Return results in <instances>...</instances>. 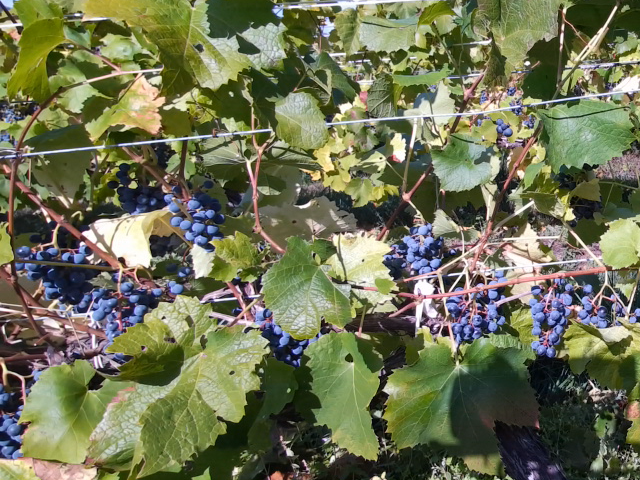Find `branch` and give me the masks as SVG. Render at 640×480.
Instances as JSON below:
<instances>
[{"mask_svg":"<svg viewBox=\"0 0 640 480\" xmlns=\"http://www.w3.org/2000/svg\"><path fill=\"white\" fill-rule=\"evenodd\" d=\"M541 129H542V125L538 124L536 126V128L534 129V131L532 132V134L530 135L529 140L527 141V143L524 145L522 150L519 152L518 157H516L514 159L513 164L511 166L510 170L508 171V174H507L505 180L503 181V185L500 188V190L498 192V196L496 198V205H495V209L493 211L492 218L488 219L486 233L481 238L478 253H477L475 259L473 260L471 267L469 268L468 276H467V279H466V281L464 283V288L465 289L464 290H453V291H442V292L435 293V294H421V295L414 294V293H409V292H405V291H400V290H392L391 291L392 295L412 298L414 300L437 299V298H441V297H445V296L467 295V294H472V293H475V292L488 291V290H492L493 288H496V287L511 286V285H515V284L536 282V281H540V280H550V279H553L554 277L582 276V275H586V274H589V273H593L594 275H598V274H601V273H605L606 271H612L613 270L612 266H603V267H590V268L583 269V270H580V271H571V272L557 271V272H552L551 274H548V275H538V276H534V277L518 278V279L509 280V281L493 282V283H491L489 285H486V286H478V287L469 288V286H470V284L472 282V279H473L472 271L476 269L478 263L480 262V259L483 256L485 243L491 236L492 225H493V222H494L498 207H499V205L501 203V200L503 198V195H504V193H505V191H506V189L508 187V184H509L510 180L512 179V176H513L515 170L520 168V164H521V162L523 160L524 155L526 154V152L528 151V149L530 148V146L534 142L535 138L537 137V135H538V133H539V131Z\"/></svg>","mask_w":640,"mask_h":480,"instance_id":"obj_1","label":"branch"},{"mask_svg":"<svg viewBox=\"0 0 640 480\" xmlns=\"http://www.w3.org/2000/svg\"><path fill=\"white\" fill-rule=\"evenodd\" d=\"M19 161L17 159H13L11 161V168L8 166L5 160H0L1 169L9 176V186H8V204L6 210L7 217V233L11 237L10 245L12 246L13 254H15L14 250V206H15V188L20 189L26 196L33 200V202L42 208L45 212H47L56 222H58L63 228L67 229L75 238H77L80 242L90 247L95 253L104 258L109 264H111L115 269L120 271V262L112 257L107 251L99 247L94 241L90 238L84 236L80 231H78L70 222L64 220L51 206L45 203L41 198H39L28 186L22 183L17 177Z\"/></svg>","mask_w":640,"mask_h":480,"instance_id":"obj_2","label":"branch"},{"mask_svg":"<svg viewBox=\"0 0 640 480\" xmlns=\"http://www.w3.org/2000/svg\"><path fill=\"white\" fill-rule=\"evenodd\" d=\"M162 71H163L162 67L144 68V69H136V70H117V71H113V72H110V73H107V74L98 75V76L90 77V78H87V79H82V80L70 83L68 85H64L63 87L59 88L54 93L49 95L45 99V101H43L41 103V105L37 108L35 113L29 118L28 123L25 125L22 133L18 137V140H17V142L15 144V147H14V152L15 153L19 152L21 144L23 143L24 138L28 134L30 127L33 126L34 121L41 114V112L46 108V106L53 99L58 97L60 94L66 92L67 90L76 88V87L84 85V84H89V83H93V82L100 81V80L110 79V78H113V77H116V76H119V75H139V74L156 73V72H162Z\"/></svg>","mask_w":640,"mask_h":480,"instance_id":"obj_3","label":"branch"},{"mask_svg":"<svg viewBox=\"0 0 640 480\" xmlns=\"http://www.w3.org/2000/svg\"><path fill=\"white\" fill-rule=\"evenodd\" d=\"M10 271L12 274V277L10 276V274L3 268L0 267V275L1 278L3 280L6 281V283L12 288L14 289V292L17 294L25 312H26V316L29 318V322L33 325L35 331L37 333H39V335L46 341L48 342L50 345H52L53 347H55L58 351L62 350V346L57 343L55 340H53L52 338H50L38 325V323L34 320V317L32 315L31 309L28 306V304L31 307H36L38 305V302L36 300H34V298L26 291L24 290L21 285L19 284L18 281V277H17V272H16V268H15V262L11 261L10 262Z\"/></svg>","mask_w":640,"mask_h":480,"instance_id":"obj_4","label":"branch"},{"mask_svg":"<svg viewBox=\"0 0 640 480\" xmlns=\"http://www.w3.org/2000/svg\"><path fill=\"white\" fill-rule=\"evenodd\" d=\"M274 138H275V134L271 133L270 136L263 142L262 146L258 150V156L256 160L254 174H253L254 178L252 179V203H253V212H254L255 222H256L253 224V231L255 234H258L259 236H262L265 240H267L275 250H277L281 254H285L286 250L283 247L276 244V242L264 230H262L260 213L258 209V201H257V182H258L261 162L263 159V152L265 151L267 146L271 143V141Z\"/></svg>","mask_w":640,"mask_h":480,"instance_id":"obj_5","label":"branch"},{"mask_svg":"<svg viewBox=\"0 0 640 480\" xmlns=\"http://www.w3.org/2000/svg\"><path fill=\"white\" fill-rule=\"evenodd\" d=\"M622 0H616V3L614 4V8L612 9V11L610 12V14L606 17V19L604 20L603 24L601 25L598 33L596 34V36L592 39V41L589 43V45L587 46V48L582 52V54L579 56L578 59H576L573 64H571L569 66V68L566 70V72L564 73L563 77L561 78L558 86L556 87V89L552 92V99H557V95L560 93V91L563 89L564 84L566 82V80L568 79L569 75L571 74V72L579 65L583 63V60L585 59V57L589 54V52L593 49V47L595 46V44L598 42V40L601 38V36L604 34L606 28L608 27L610 21L615 17L617 11L619 10V7L621 5Z\"/></svg>","mask_w":640,"mask_h":480,"instance_id":"obj_6","label":"branch"},{"mask_svg":"<svg viewBox=\"0 0 640 480\" xmlns=\"http://www.w3.org/2000/svg\"><path fill=\"white\" fill-rule=\"evenodd\" d=\"M36 314L38 316H46L47 318L65 324L67 327L75 329V330H82L84 332H87L89 334H93V335H97L101 338H104L106 336V332L102 329L96 328V327H92L89 326L87 324L84 323H77L74 321H71L69 318L64 317L62 315H58L52 311L49 310H44V309H38L36 311Z\"/></svg>","mask_w":640,"mask_h":480,"instance_id":"obj_7","label":"branch"},{"mask_svg":"<svg viewBox=\"0 0 640 480\" xmlns=\"http://www.w3.org/2000/svg\"><path fill=\"white\" fill-rule=\"evenodd\" d=\"M433 169L432 165H428L425 170L418 176L417 180L415 181V183L412 185V187L410 188L409 192L404 195L402 197V199L400 200V202L398 203V205L396 206V208L394 209V211L392 212V214L389 216L387 222L385 223L382 231H380L377 236H376V240L380 241L381 238L388 232L389 227L391 226V224L394 221V218L399 214V212L401 211L402 207L404 206V204L406 203V201L411 198L416 189L418 188V186L422 183L423 179L428 175V173Z\"/></svg>","mask_w":640,"mask_h":480,"instance_id":"obj_8","label":"branch"},{"mask_svg":"<svg viewBox=\"0 0 640 480\" xmlns=\"http://www.w3.org/2000/svg\"><path fill=\"white\" fill-rule=\"evenodd\" d=\"M123 150L126 151L128 155H130L144 170H146L155 180L162 183L167 189L171 188V184L167 182L164 178L156 174L154 170H152L139 156H137L130 148L123 147Z\"/></svg>","mask_w":640,"mask_h":480,"instance_id":"obj_9","label":"branch"},{"mask_svg":"<svg viewBox=\"0 0 640 480\" xmlns=\"http://www.w3.org/2000/svg\"><path fill=\"white\" fill-rule=\"evenodd\" d=\"M227 285L233 290L234 295L237 296V299L240 302L241 305V310L245 311V315L246 318L248 319L249 322L253 321V316L251 315V312L249 310H246V303L245 300L243 298V294L241 293V291L233 284L232 281H228Z\"/></svg>","mask_w":640,"mask_h":480,"instance_id":"obj_10","label":"branch"},{"mask_svg":"<svg viewBox=\"0 0 640 480\" xmlns=\"http://www.w3.org/2000/svg\"><path fill=\"white\" fill-rule=\"evenodd\" d=\"M484 77H485V74H484V73H480V74H479V75L474 79V81L472 82V84H471V86H470L469 90L467 91V93H466V95L464 96V98H463L462 102L460 103V106H459V111H460V112H463V111H464L465 106H466V104H467L468 100L471 98V96H472L473 92L475 91L476 86L478 85V83H479V82H480Z\"/></svg>","mask_w":640,"mask_h":480,"instance_id":"obj_11","label":"branch"},{"mask_svg":"<svg viewBox=\"0 0 640 480\" xmlns=\"http://www.w3.org/2000/svg\"><path fill=\"white\" fill-rule=\"evenodd\" d=\"M332 282L334 284L350 286V288L354 290H365L366 292H374L376 290V287L373 285H357V284H352L351 281L337 279V278H333Z\"/></svg>","mask_w":640,"mask_h":480,"instance_id":"obj_12","label":"branch"},{"mask_svg":"<svg viewBox=\"0 0 640 480\" xmlns=\"http://www.w3.org/2000/svg\"><path fill=\"white\" fill-rule=\"evenodd\" d=\"M188 142L182 143L181 157H180V165H179V176H178V184H183L184 179V167H185V159L187 153Z\"/></svg>","mask_w":640,"mask_h":480,"instance_id":"obj_13","label":"branch"},{"mask_svg":"<svg viewBox=\"0 0 640 480\" xmlns=\"http://www.w3.org/2000/svg\"><path fill=\"white\" fill-rule=\"evenodd\" d=\"M137 279L142 285H146L152 288H158V285H156L154 282H152L148 278L141 277L140 274H137Z\"/></svg>","mask_w":640,"mask_h":480,"instance_id":"obj_14","label":"branch"}]
</instances>
